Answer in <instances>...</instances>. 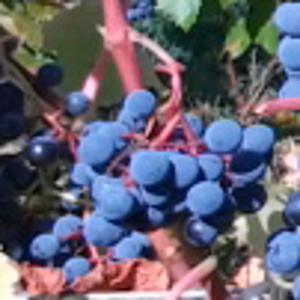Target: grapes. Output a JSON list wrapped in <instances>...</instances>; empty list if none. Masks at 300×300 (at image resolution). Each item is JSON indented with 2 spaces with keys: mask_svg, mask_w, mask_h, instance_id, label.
<instances>
[{
  "mask_svg": "<svg viewBox=\"0 0 300 300\" xmlns=\"http://www.w3.org/2000/svg\"><path fill=\"white\" fill-rule=\"evenodd\" d=\"M79 137L65 192L88 191L92 211L55 215L26 242L30 259L63 269L67 285L91 274L94 257L110 265L148 258L153 243L142 232L168 228L183 213V243L211 248L232 212H257L268 197L257 183L277 135L264 123L218 117L205 128L180 101L157 105L150 91L136 90L123 96L120 119L85 121Z\"/></svg>",
  "mask_w": 300,
  "mask_h": 300,
  "instance_id": "1",
  "label": "grapes"
},
{
  "mask_svg": "<svg viewBox=\"0 0 300 300\" xmlns=\"http://www.w3.org/2000/svg\"><path fill=\"white\" fill-rule=\"evenodd\" d=\"M283 220L291 229H278L266 244V266L274 276H291V299L300 300V190L286 200Z\"/></svg>",
  "mask_w": 300,
  "mask_h": 300,
  "instance_id": "2",
  "label": "grapes"
},
{
  "mask_svg": "<svg viewBox=\"0 0 300 300\" xmlns=\"http://www.w3.org/2000/svg\"><path fill=\"white\" fill-rule=\"evenodd\" d=\"M274 21L281 34L275 41V54L285 67L278 95L300 100V4H280L274 11Z\"/></svg>",
  "mask_w": 300,
  "mask_h": 300,
  "instance_id": "3",
  "label": "grapes"
},
{
  "mask_svg": "<svg viewBox=\"0 0 300 300\" xmlns=\"http://www.w3.org/2000/svg\"><path fill=\"white\" fill-rule=\"evenodd\" d=\"M25 93L16 82L0 83V144L16 140L24 128Z\"/></svg>",
  "mask_w": 300,
  "mask_h": 300,
  "instance_id": "4",
  "label": "grapes"
},
{
  "mask_svg": "<svg viewBox=\"0 0 300 300\" xmlns=\"http://www.w3.org/2000/svg\"><path fill=\"white\" fill-rule=\"evenodd\" d=\"M62 136L53 126L38 129L29 138L25 157L36 167H53L60 160Z\"/></svg>",
  "mask_w": 300,
  "mask_h": 300,
  "instance_id": "5",
  "label": "grapes"
},
{
  "mask_svg": "<svg viewBox=\"0 0 300 300\" xmlns=\"http://www.w3.org/2000/svg\"><path fill=\"white\" fill-rule=\"evenodd\" d=\"M90 108V99L81 92L66 94L61 99V110L67 117L81 118Z\"/></svg>",
  "mask_w": 300,
  "mask_h": 300,
  "instance_id": "6",
  "label": "grapes"
},
{
  "mask_svg": "<svg viewBox=\"0 0 300 300\" xmlns=\"http://www.w3.org/2000/svg\"><path fill=\"white\" fill-rule=\"evenodd\" d=\"M37 77L45 87H55L66 78V71L62 66L47 64L37 71Z\"/></svg>",
  "mask_w": 300,
  "mask_h": 300,
  "instance_id": "7",
  "label": "grapes"
}]
</instances>
